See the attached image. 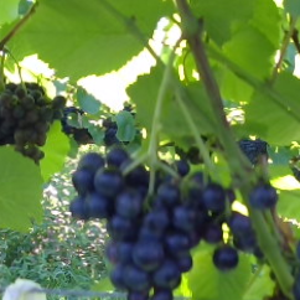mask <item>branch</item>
<instances>
[{
    "mask_svg": "<svg viewBox=\"0 0 300 300\" xmlns=\"http://www.w3.org/2000/svg\"><path fill=\"white\" fill-rule=\"evenodd\" d=\"M176 3L178 4L180 12L182 35L188 40L189 46L193 51L195 63L198 66L200 75L204 81V89L209 97L212 112L215 115L226 154L232 164L244 202L253 219L255 231L259 237V245L271 264V268L281 292L289 299H294L297 296L298 291L297 279L290 274L285 266V262L274 241L271 229L269 228V223L265 220L261 207L253 192L249 176L235 144L233 133L231 131V124L227 118L225 108L223 107L219 87L210 64L208 63V56L225 65L232 72L236 73L239 78L255 87L261 94L265 95L273 102L277 103L298 121H300V112L286 103L282 98L275 95L266 84L245 72L241 67L234 65L227 58L222 57L220 54L209 48L206 43H203L201 33L194 19L188 0H176Z\"/></svg>",
    "mask_w": 300,
    "mask_h": 300,
    "instance_id": "obj_1",
    "label": "branch"
},
{
    "mask_svg": "<svg viewBox=\"0 0 300 300\" xmlns=\"http://www.w3.org/2000/svg\"><path fill=\"white\" fill-rule=\"evenodd\" d=\"M37 10L38 5L33 3L30 9L15 23V25L3 35L0 39V51H2V47L5 46L7 41L21 29V27L37 12Z\"/></svg>",
    "mask_w": 300,
    "mask_h": 300,
    "instance_id": "obj_2",
    "label": "branch"
}]
</instances>
